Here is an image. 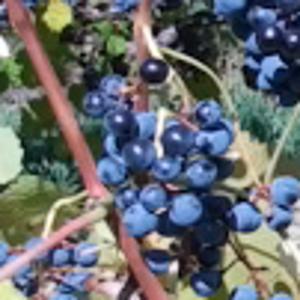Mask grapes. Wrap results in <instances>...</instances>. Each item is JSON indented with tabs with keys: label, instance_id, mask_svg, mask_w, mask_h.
<instances>
[{
	"label": "grapes",
	"instance_id": "obj_3",
	"mask_svg": "<svg viewBox=\"0 0 300 300\" xmlns=\"http://www.w3.org/2000/svg\"><path fill=\"white\" fill-rule=\"evenodd\" d=\"M101 250L94 241H85L66 247H51L35 260L49 268H61L57 290L51 295V300H81L78 291L91 276V269L100 259Z\"/></svg>",
	"mask_w": 300,
	"mask_h": 300
},
{
	"label": "grapes",
	"instance_id": "obj_6",
	"mask_svg": "<svg viewBox=\"0 0 300 300\" xmlns=\"http://www.w3.org/2000/svg\"><path fill=\"white\" fill-rule=\"evenodd\" d=\"M33 269L32 265L24 267L20 272L16 273L12 279L19 293L25 298H30L34 292L33 279L27 274Z\"/></svg>",
	"mask_w": 300,
	"mask_h": 300
},
{
	"label": "grapes",
	"instance_id": "obj_4",
	"mask_svg": "<svg viewBox=\"0 0 300 300\" xmlns=\"http://www.w3.org/2000/svg\"><path fill=\"white\" fill-rule=\"evenodd\" d=\"M193 291L199 296L212 295L222 284V275L217 270L201 269L189 277Z\"/></svg>",
	"mask_w": 300,
	"mask_h": 300
},
{
	"label": "grapes",
	"instance_id": "obj_2",
	"mask_svg": "<svg viewBox=\"0 0 300 300\" xmlns=\"http://www.w3.org/2000/svg\"><path fill=\"white\" fill-rule=\"evenodd\" d=\"M231 34L245 40L244 73L258 91L300 103V0H212Z\"/></svg>",
	"mask_w": 300,
	"mask_h": 300
},
{
	"label": "grapes",
	"instance_id": "obj_1",
	"mask_svg": "<svg viewBox=\"0 0 300 300\" xmlns=\"http://www.w3.org/2000/svg\"><path fill=\"white\" fill-rule=\"evenodd\" d=\"M141 80L152 86L149 109L134 111L123 93L118 72L98 77L83 93V113L102 118L103 150L96 164L100 185L113 188L112 204L122 211L121 228L129 237L154 232L163 240L179 239L192 227L193 253L215 268L230 233H252L263 225L285 231L295 221L289 205L300 199V182L277 176L270 205L262 215L253 202L208 193L234 173L221 154L236 137L232 122L221 119L213 97L197 99L180 70L166 58L143 60Z\"/></svg>",
	"mask_w": 300,
	"mask_h": 300
},
{
	"label": "grapes",
	"instance_id": "obj_7",
	"mask_svg": "<svg viewBox=\"0 0 300 300\" xmlns=\"http://www.w3.org/2000/svg\"><path fill=\"white\" fill-rule=\"evenodd\" d=\"M258 292L252 285L240 283L230 292L231 300H257Z\"/></svg>",
	"mask_w": 300,
	"mask_h": 300
},
{
	"label": "grapes",
	"instance_id": "obj_5",
	"mask_svg": "<svg viewBox=\"0 0 300 300\" xmlns=\"http://www.w3.org/2000/svg\"><path fill=\"white\" fill-rule=\"evenodd\" d=\"M142 259L153 274H164L172 265L173 257L160 249H151L145 252Z\"/></svg>",
	"mask_w": 300,
	"mask_h": 300
}]
</instances>
